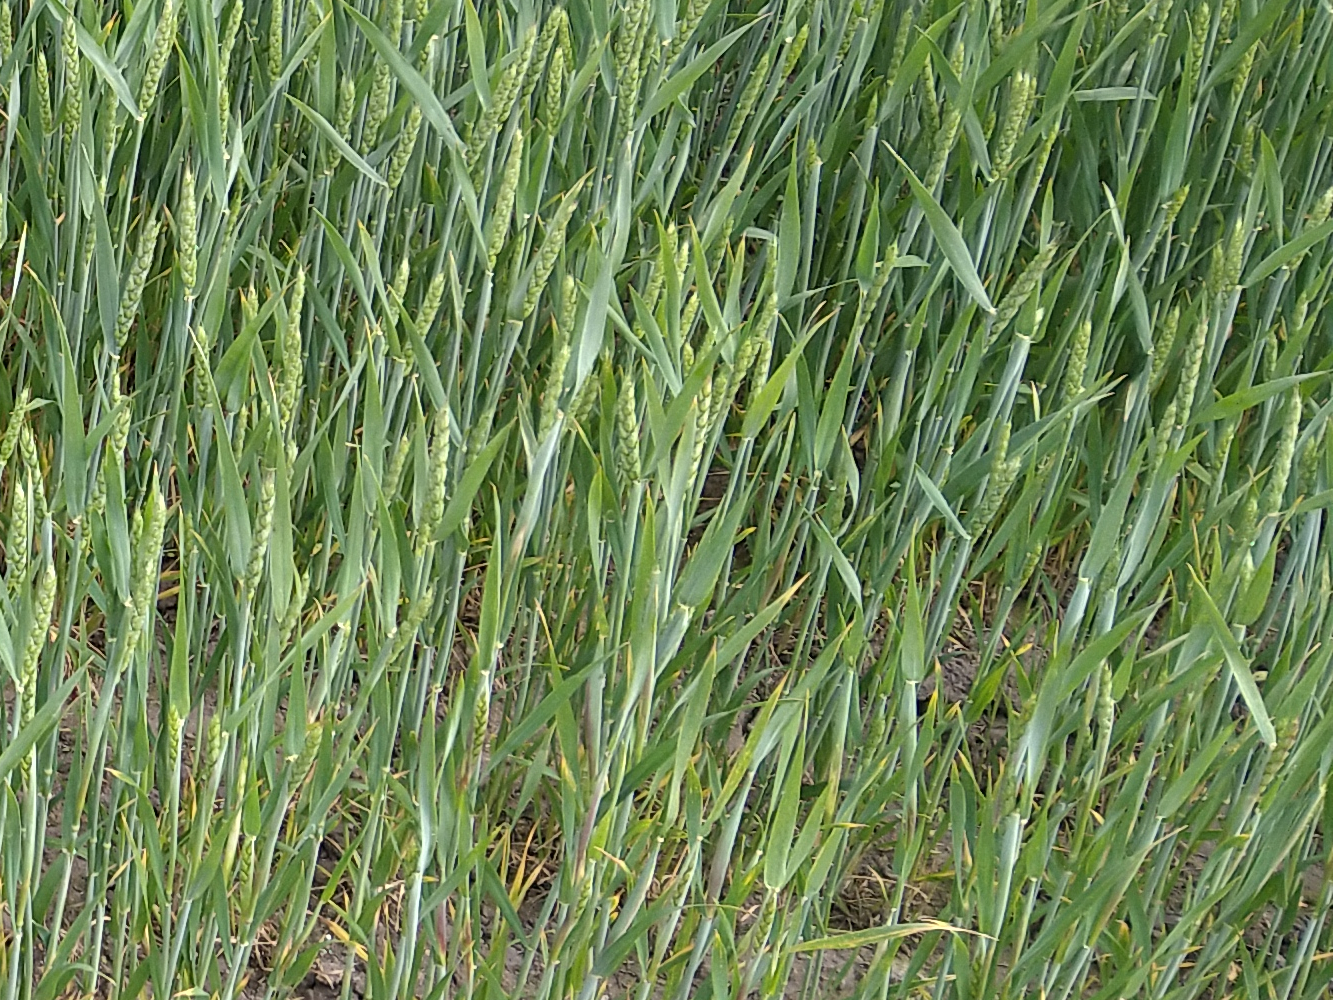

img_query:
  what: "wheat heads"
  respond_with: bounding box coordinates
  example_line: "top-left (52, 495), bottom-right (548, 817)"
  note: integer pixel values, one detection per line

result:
top-left (469, 415), bottom-right (490, 466)
top-left (1290, 6), bottom-right (1304, 60)
top-left (403, 276), bottom-right (444, 373)
top-left (7, 483), bottom-right (31, 578)
top-left (725, 55), bottom-right (768, 150)
top-left (134, 0), bottom-right (176, 120)
top-left (558, 11), bottom-right (575, 77)
top-left (524, 219), bottom-right (568, 317)
top-left (117, 219), bottom-right (161, 352)
top-left (988, 420), bottom-right (1012, 487)
top-left (239, 838), bottom-right (256, 891)
top-left (105, 80), bottom-right (117, 154)
top-left (86, 208), bottom-right (99, 264)
top-left (414, 0), bottom-right (430, 74)
top-left (1175, 321), bottom-right (1208, 439)
top-left (1266, 392), bottom-right (1301, 503)
top-left (633, 251), bottom-right (665, 333)
top-left (868, 0), bottom-right (885, 26)
top-left (372, 433), bottom-right (412, 525)
top-left (191, 324), bottom-right (211, 412)
top-left (69, 515), bottom-right (92, 546)
top-left (709, 378), bottom-right (728, 421)
top-left (1300, 439), bottom-right (1321, 530)
top-left (557, 274), bottom-right (577, 352)
top-left (1003, 699), bottom-right (1034, 784)
top-left (285, 728), bottom-right (325, 796)
top-left (374, 0), bottom-right (404, 52)
top-left (944, 44), bottom-right (964, 123)
top-left (665, 222), bottom-right (677, 258)
top-left (1008, 1), bottom-right (1023, 38)
top-left (401, 0), bottom-right (414, 17)
top-left (178, 172), bottom-right (198, 288)
top-left (864, 717), bottom-right (886, 767)
top-left (1060, 322), bottom-right (1091, 438)
top-left (1158, 185), bottom-right (1190, 236)
top-left (980, 246), bottom-right (1056, 352)
top-left (1019, 77), bottom-right (1037, 132)
top-left (1264, 335), bottom-right (1276, 380)
top-left (282, 272), bottom-right (306, 388)
top-left (619, 380), bottom-right (641, 482)
top-left (888, 10), bottom-right (913, 83)
top-left (21, 676), bottom-right (37, 790)
top-left (243, 475), bottom-right (277, 595)
top-left (1131, 17), bottom-right (1154, 85)
top-left (389, 594), bottom-right (437, 659)
top-left (184, 510), bottom-right (196, 583)
top-left (236, 403), bottom-right (248, 459)
top-left (548, 52), bottom-right (563, 127)
top-left (121, 491), bottom-right (166, 672)
top-left (722, 339), bottom-right (753, 410)
top-left (294, 0), bottom-right (302, 20)
top-left (221, 87), bottom-right (230, 145)
top-left (169, 706), bottom-right (184, 769)
top-left (0, 205), bottom-right (4, 279)
top-left (923, 51), bottom-right (943, 142)
top-left (578, 373), bottom-right (600, 419)
top-left (286, 443), bottom-right (299, 491)
top-left (1207, 1), bottom-right (1234, 64)
top-left (1182, 4), bottom-right (1211, 101)
top-left (1259, 720), bottom-right (1301, 799)
top-left (1110, 0), bottom-right (1130, 40)
top-left (472, 684), bottom-right (489, 758)
top-left (638, 27), bottom-right (663, 86)
top-left (38, 47), bottom-right (55, 133)
top-left (1206, 243), bottom-right (1224, 313)
top-left (783, 26), bottom-right (810, 80)
top-left (981, 112), bottom-right (996, 142)
top-left (1015, 543), bottom-right (1041, 593)
top-left (1291, 292), bottom-right (1309, 330)
top-left (1034, 120), bottom-right (1060, 182)
top-left (498, 29), bottom-right (537, 120)
top-left (279, 572), bottom-right (311, 644)
top-left (299, 11), bottom-right (318, 74)
top-left (1231, 42), bottom-right (1257, 106)
top-left (1009, 71), bottom-right (1022, 117)
top-left (612, 0), bottom-right (651, 76)
top-left (277, 383), bottom-right (300, 440)
top-left (204, 713), bottom-right (220, 774)
top-left (464, 65), bottom-right (515, 167)
top-left (518, 8), bottom-right (562, 101)
top-left (768, 242), bottom-right (780, 298)
top-left (676, 243), bottom-right (688, 280)
top-left (0, 5), bottom-right (13, 62)
top-left (681, 341), bottom-right (693, 382)
top-left (424, 407), bottom-right (450, 533)
top-left (1157, 0), bottom-right (1196, 34)
top-left (663, 0), bottom-right (727, 77)
top-left (218, 197), bottom-right (239, 264)
top-left (679, 290), bottom-right (701, 339)
top-left (754, 295), bottom-right (779, 345)
top-left (487, 130), bottom-right (524, 255)
top-left (1210, 423), bottom-right (1235, 478)
top-left (1222, 225), bottom-right (1247, 288)
top-left (20, 564), bottom-right (57, 676)
top-left (806, 138), bottom-right (818, 185)
top-left (1093, 2), bottom-right (1107, 60)
top-left (687, 336), bottom-right (715, 494)
top-left (1203, 656), bottom-right (1221, 689)
top-left (572, 876), bottom-right (595, 920)
top-left (988, 72), bottom-right (1030, 173)
top-left (360, 50), bottom-right (390, 155)
top-left (246, 288), bottom-right (258, 313)
top-left (131, 510), bottom-right (143, 542)
top-left (2, 387), bottom-right (30, 456)
top-left (990, 0), bottom-right (1004, 55)
top-left (20, 426), bottom-right (47, 528)
top-left (923, 114), bottom-right (962, 196)
top-left (218, 0), bottom-right (243, 78)
top-left (836, 0), bottom-right (873, 68)
top-left (272, 0), bottom-right (282, 87)
top-left (390, 260), bottom-right (410, 323)
top-left (327, 75), bottom-right (355, 166)
top-left (63, 17), bottom-right (84, 155)
top-left (854, 241), bottom-right (899, 332)
top-left (750, 892), bottom-right (776, 971)
top-left (1152, 399), bottom-right (1176, 474)
top-left (540, 345), bottom-right (570, 444)
top-left (1287, 185), bottom-right (1333, 266)
top-left (388, 105), bottom-right (423, 187)
top-left (755, 340), bottom-right (773, 402)
top-left (972, 459), bottom-right (1023, 546)
top-left (707, 216), bottom-right (733, 282)
top-left (66, 0), bottom-right (77, 17)
top-left (1152, 305), bottom-right (1180, 385)
top-left (93, 406), bottom-right (131, 513)
top-left (640, 0), bottom-right (655, 36)
top-left (616, 58), bottom-right (638, 146)
top-left (1098, 669), bottom-right (1113, 740)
